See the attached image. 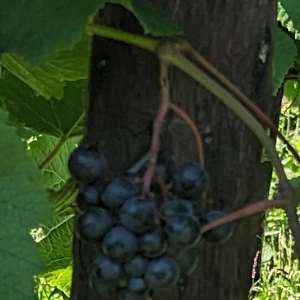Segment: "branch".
<instances>
[{
	"label": "branch",
	"mask_w": 300,
	"mask_h": 300,
	"mask_svg": "<svg viewBox=\"0 0 300 300\" xmlns=\"http://www.w3.org/2000/svg\"><path fill=\"white\" fill-rule=\"evenodd\" d=\"M86 30L103 38L153 52L160 61H166L168 64H173L187 73L206 91H209L217 99L221 100L227 108L235 113L249 129L253 137L265 147L270 162L274 167L279 185L277 195L274 199L262 200L255 204L244 206L237 211H232L230 216L234 220H237L268 208L286 209L290 229L295 239V250L300 252V224L296 212V206L298 205L297 191L290 185L282 160L279 157L275 145L272 143V138L269 136L266 129L253 118L245 107L235 99L229 91L215 83L200 68L185 59L184 56L178 52V46L175 43L161 41L153 37L101 26L95 23H88L86 25Z\"/></svg>",
	"instance_id": "branch-1"
}]
</instances>
